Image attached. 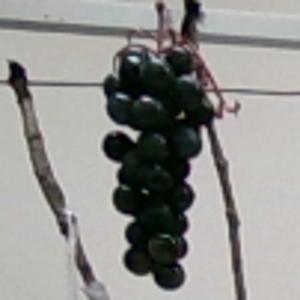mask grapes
<instances>
[{
    "instance_id": "grapes-1",
    "label": "grapes",
    "mask_w": 300,
    "mask_h": 300,
    "mask_svg": "<svg viewBox=\"0 0 300 300\" xmlns=\"http://www.w3.org/2000/svg\"><path fill=\"white\" fill-rule=\"evenodd\" d=\"M198 65L196 52L186 46H171L160 59L146 45L130 44L121 51L118 71L104 78L108 118L140 132L135 141L119 130L102 140L105 158L122 164L112 205L121 215L134 217L124 231L131 247L123 263L132 276L153 274L165 292L179 289L186 280L178 261L189 251L183 237L190 227L185 212L196 200L186 182L189 159L202 152L201 128L216 118L214 103L191 78Z\"/></svg>"
}]
</instances>
